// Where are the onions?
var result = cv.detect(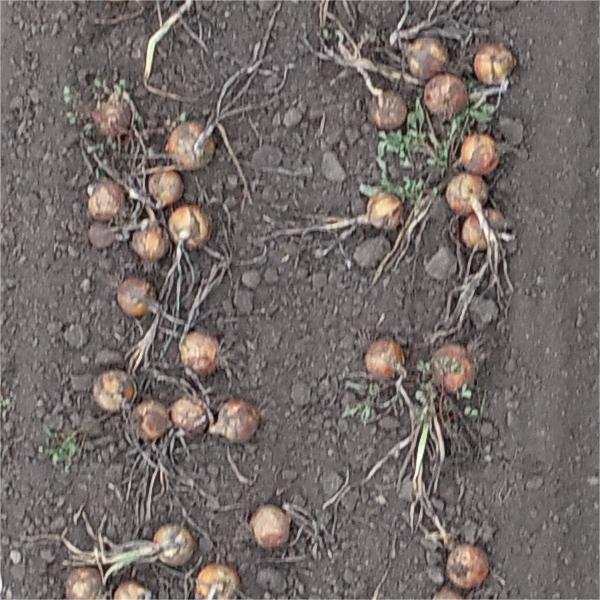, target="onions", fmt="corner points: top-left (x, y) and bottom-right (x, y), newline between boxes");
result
(90, 95), (131, 136)
(170, 396), (206, 434)
(107, 575), (150, 599)
(155, 523), (195, 564)
(433, 585), (461, 600)
(443, 543), (488, 587)
(149, 167), (183, 201)
(421, 73), (467, 118)
(114, 275), (155, 316)
(63, 565), (101, 598)
(194, 562), (239, 597)
(428, 343), (475, 391)
(471, 42), (513, 81)
(179, 330), (219, 373)
(211, 397), (257, 442)
(446, 174), (486, 211)
(407, 33), (450, 78)
(85, 179), (123, 219)
(457, 133), (496, 173)
(130, 224), (166, 260)
(248, 504), (287, 547)
(363, 337), (404, 379)
(91, 370), (133, 412)
(366, 192), (402, 225)
(168, 119), (215, 168)
(166, 205), (209, 245)
(369, 92), (405, 127)
(132, 401), (168, 440)
(466, 215), (496, 246)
